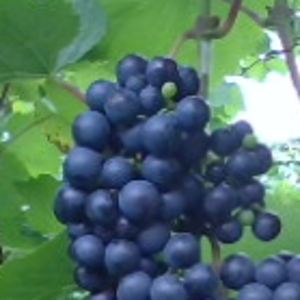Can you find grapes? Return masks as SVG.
<instances>
[{
    "label": "grapes",
    "mask_w": 300,
    "mask_h": 300,
    "mask_svg": "<svg viewBox=\"0 0 300 300\" xmlns=\"http://www.w3.org/2000/svg\"><path fill=\"white\" fill-rule=\"evenodd\" d=\"M116 82L96 79L89 110L76 114V144L62 160L64 184L53 212L67 225L75 280L91 300H300V255H228L215 270L200 262V239L236 244L252 212L257 238L277 237L281 222L265 212L263 144L245 119L206 136L211 115L197 70L170 54L121 56ZM221 281L223 282L224 287L227 289H232L234 291H239L237 297H227L224 292L221 290Z\"/></svg>",
    "instance_id": "obj_1"
}]
</instances>
